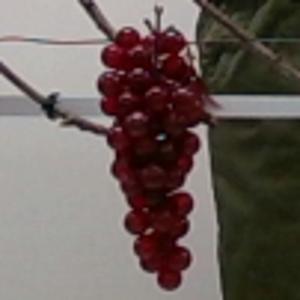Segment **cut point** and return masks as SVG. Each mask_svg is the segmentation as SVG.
<instances>
[{"label":"cut point","instance_id":"cut-point-1","mask_svg":"<svg viewBox=\"0 0 300 300\" xmlns=\"http://www.w3.org/2000/svg\"><path fill=\"white\" fill-rule=\"evenodd\" d=\"M165 12L164 5L162 4V0H155V4L153 6V13L156 20V33L162 35V15Z\"/></svg>","mask_w":300,"mask_h":300}]
</instances>
